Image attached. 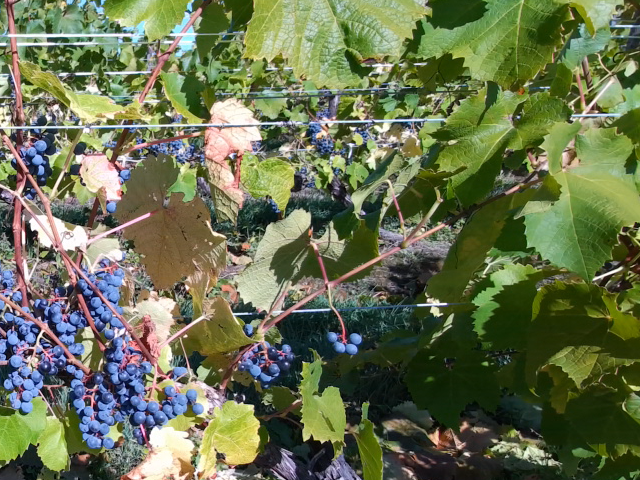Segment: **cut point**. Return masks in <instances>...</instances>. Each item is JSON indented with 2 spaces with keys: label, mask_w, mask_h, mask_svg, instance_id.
<instances>
[{
  "label": "cut point",
  "mask_w": 640,
  "mask_h": 480,
  "mask_svg": "<svg viewBox=\"0 0 640 480\" xmlns=\"http://www.w3.org/2000/svg\"><path fill=\"white\" fill-rule=\"evenodd\" d=\"M327 294H328L329 307L331 309V312H332L333 316L336 317L338 320H341L342 319V315L339 314V312L336 310L335 305H334L332 288L327 292Z\"/></svg>",
  "instance_id": "1"
},
{
  "label": "cut point",
  "mask_w": 640,
  "mask_h": 480,
  "mask_svg": "<svg viewBox=\"0 0 640 480\" xmlns=\"http://www.w3.org/2000/svg\"><path fill=\"white\" fill-rule=\"evenodd\" d=\"M45 330L44 329H40V331L37 333V336L35 338V345L39 346L40 345V340L42 339V336L44 335Z\"/></svg>",
  "instance_id": "2"
}]
</instances>
